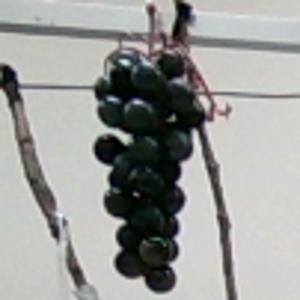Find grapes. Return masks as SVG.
Wrapping results in <instances>:
<instances>
[{
    "instance_id": "grapes-1",
    "label": "grapes",
    "mask_w": 300,
    "mask_h": 300,
    "mask_svg": "<svg viewBox=\"0 0 300 300\" xmlns=\"http://www.w3.org/2000/svg\"><path fill=\"white\" fill-rule=\"evenodd\" d=\"M110 66L95 82L96 114L104 126L132 138L124 144L105 133L93 146L96 159L112 166L104 208L126 222L115 233L122 250L114 266L125 279L142 277L148 291L166 294L176 284L170 262L180 253L176 214L186 203L176 181L194 151L192 131L205 125L208 112L194 86L178 81L187 74L188 59L176 47L158 53L154 65L140 50L120 49Z\"/></svg>"
}]
</instances>
